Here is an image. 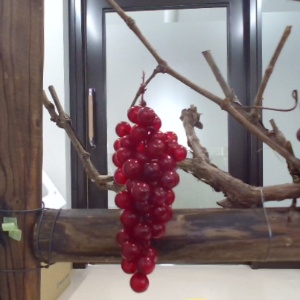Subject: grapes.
<instances>
[{
	"mask_svg": "<svg viewBox=\"0 0 300 300\" xmlns=\"http://www.w3.org/2000/svg\"><path fill=\"white\" fill-rule=\"evenodd\" d=\"M127 121L115 125L118 138L113 143L112 162L117 167L114 183L124 186L114 203L123 209L124 225L116 235L123 258L121 267L131 274L134 292L146 291L148 274L156 268L157 250L152 238H161L166 224L173 219L170 207L176 200L172 190L180 184L176 165L188 157V150L178 143L176 132H161L162 119L150 106H130Z\"/></svg>",
	"mask_w": 300,
	"mask_h": 300,
	"instance_id": "grapes-1",
	"label": "grapes"
}]
</instances>
